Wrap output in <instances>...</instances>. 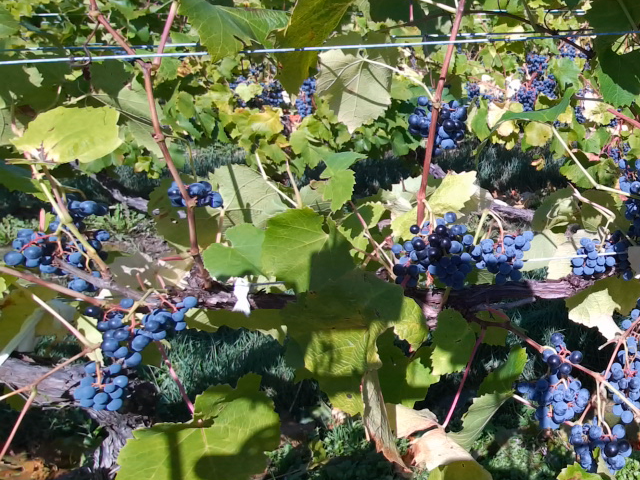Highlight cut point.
<instances>
[{
  "label": "cut point",
  "instance_id": "obj_1",
  "mask_svg": "<svg viewBox=\"0 0 640 480\" xmlns=\"http://www.w3.org/2000/svg\"><path fill=\"white\" fill-rule=\"evenodd\" d=\"M595 388H596V398H597V422L602 424L604 428L608 427V422L605 419H602V396H601V385L600 378H595Z\"/></svg>",
  "mask_w": 640,
  "mask_h": 480
},
{
  "label": "cut point",
  "instance_id": "obj_2",
  "mask_svg": "<svg viewBox=\"0 0 640 480\" xmlns=\"http://www.w3.org/2000/svg\"><path fill=\"white\" fill-rule=\"evenodd\" d=\"M422 203L424 204V206H425V208H426V210H427V213H428V220H429V221H433V220H434V217H433V210H432V207H431L430 203L428 202V200H427L426 198H423V199H422Z\"/></svg>",
  "mask_w": 640,
  "mask_h": 480
}]
</instances>
